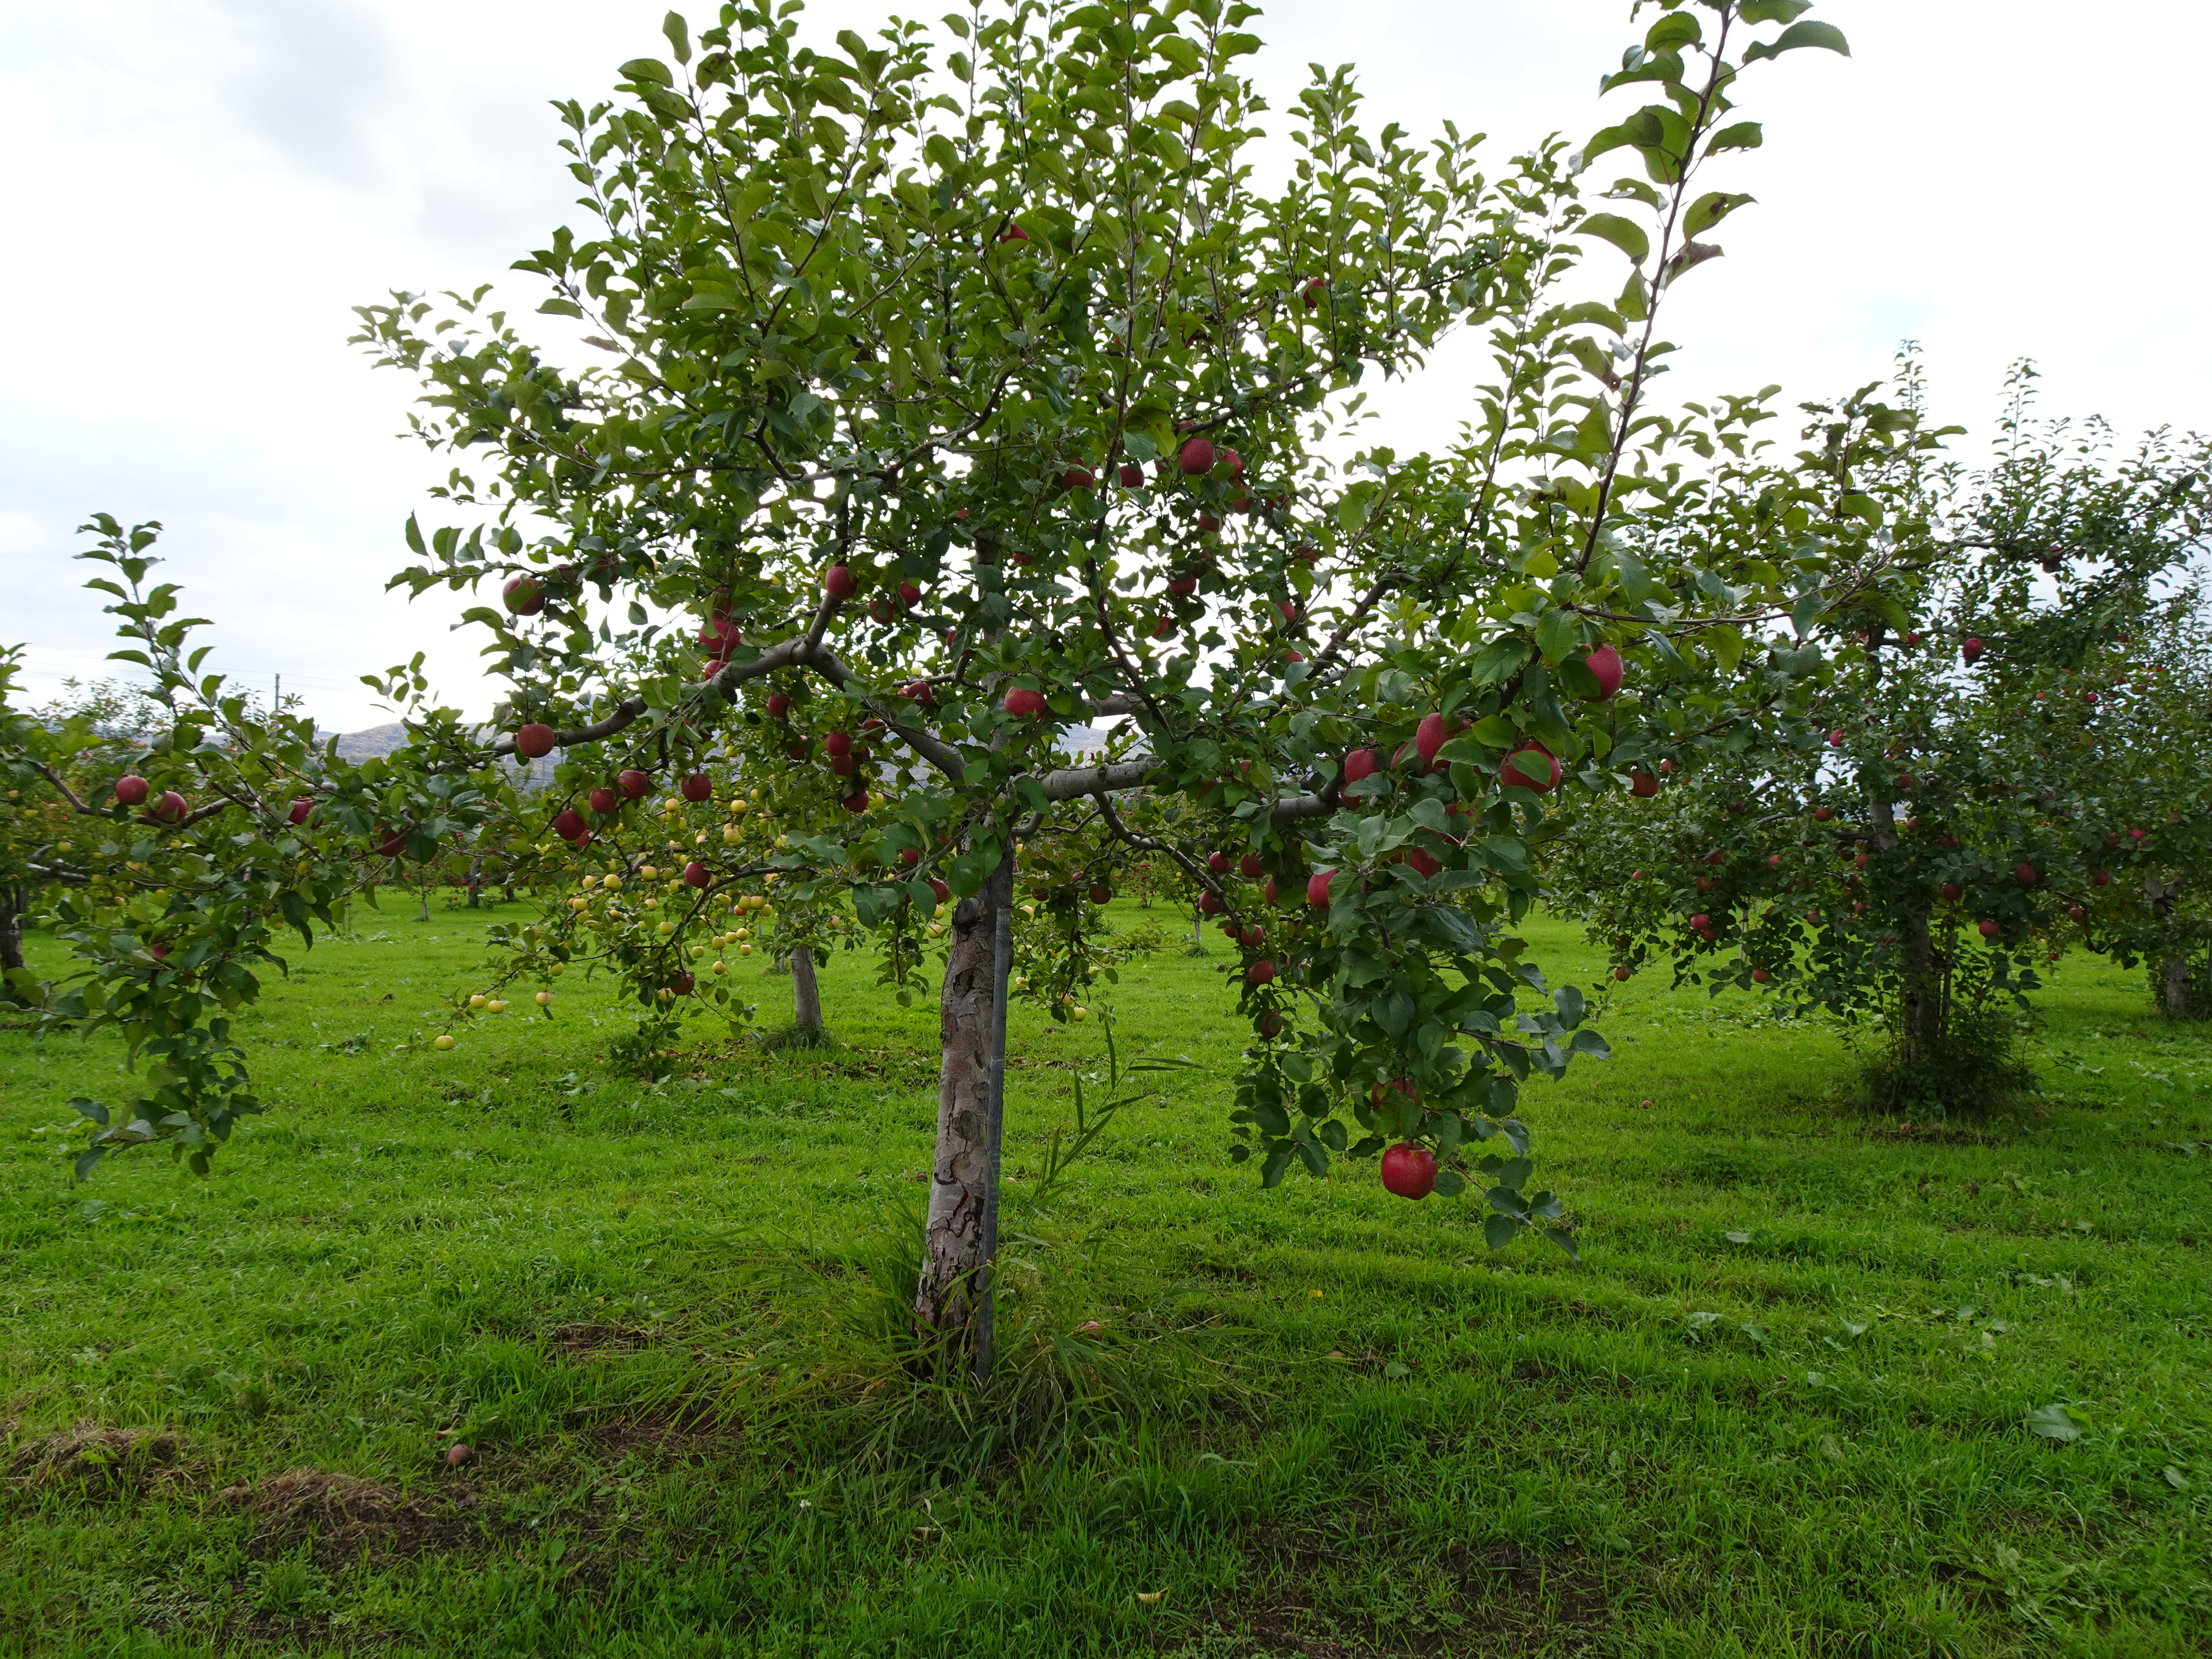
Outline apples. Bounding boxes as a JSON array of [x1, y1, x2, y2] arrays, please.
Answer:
[[146, 790, 188, 827], [1240, 850, 1267, 879], [1301, 278, 1330, 303], [680, 772, 712, 804], [888, 379, 907, 398], [709, 586, 743, 620], [2016, 537, 2036, 563], [1565, 639, 1626, 705], [1963, 637, 1988, 661], [767, 683, 804, 721], [1196, 506, 1227, 533], [1218, 450, 1251, 480], [1339, 777, 1371, 812], [703, 660, 731, 688], [1264, 488, 1295, 524], [697, 612, 740, 661], [1851, 628, 1870, 647], [1113, 326, 1140, 349], [277, 759, 297, 780], [1198, 885, 1227, 918], [824, 565, 860, 602], [1903, 631, 1921, 648], [1168, 416, 1194, 438], [166, 838, 183, 852], [952, 506, 968, 526], [1262, 871, 1289, 904], [568, 443, 585, 461], [1011, 537, 1043, 567], [1829, 726, 1852, 747], [1179, 437, 1217, 475], [1305, 862, 1348, 914], [1153, 443, 1184, 476], [1222, 912, 1242, 940], [999, 221, 1037, 252], [1294, 962, 1317, 980], [1145, 613, 1178, 645], [587, 783, 618, 815], [587, 549, 620, 586], [1342, 748, 1388, 791], [1255, 1010, 1283, 1038], [1627, 765, 1663, 800], [1437, 801, 1482, 845], [910, 663, 925, 678], [685, 859, 712, 889], [1499, 736, 1563, 799], [1267, 597, 1300, 633], [1653, 749, 1692, 788], [841, 782, 871, 815], [829, 752, 857, 776], [1389, 737, 1433, 794], [1056, 456, 1096, 496], [893, 576, 923, 612], [905, 678, 937, 709], [786, 732, 812, 764], [609, 820, 626, 834], [617, 768, 648, 801], [882, 872, 901, 887], [504, 575, 546, 618], [1416, 711, 1486, 772], [1379, 1142, 1443, 1201], [515, 721, 557, 759], [1237, 758, 1264, 787], [1087, 882, 1115, 904], [1208, 848, 1231, 877], [1237, 922, 1266, 947], [1187, 547, 1221, 582], [861, 718, 888, 744], [901, 838, 929, 866], [1274, 910, 1311, 939], [2043, 543, 2064, 566], [1385, 834, 1445, 888], [1174, 870, 1183, 880], [1267, 650, 1304, 681], [1004, 679, 1049, 726], [1247, 959, 1276, 988], [1110, 462, 1145, 496], [151, 942, 174, 959], [115, 775, 148, 807], [922, 876, 950, 907], [1165, 569, 1200, 597], [869, 598, 899, 627], [866, 789, 889, 806], [371, 822, 410, 859], [1226, 480, 1256, 515], [549, 564, 583, 599], [553, 807, 585, 842], [945, 626, 972, 656], [824, 729, 855, 757], [287, 794, 326, 833], [1370, 1075, 1420, 1117], [1291, 545, 1322, 569]]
